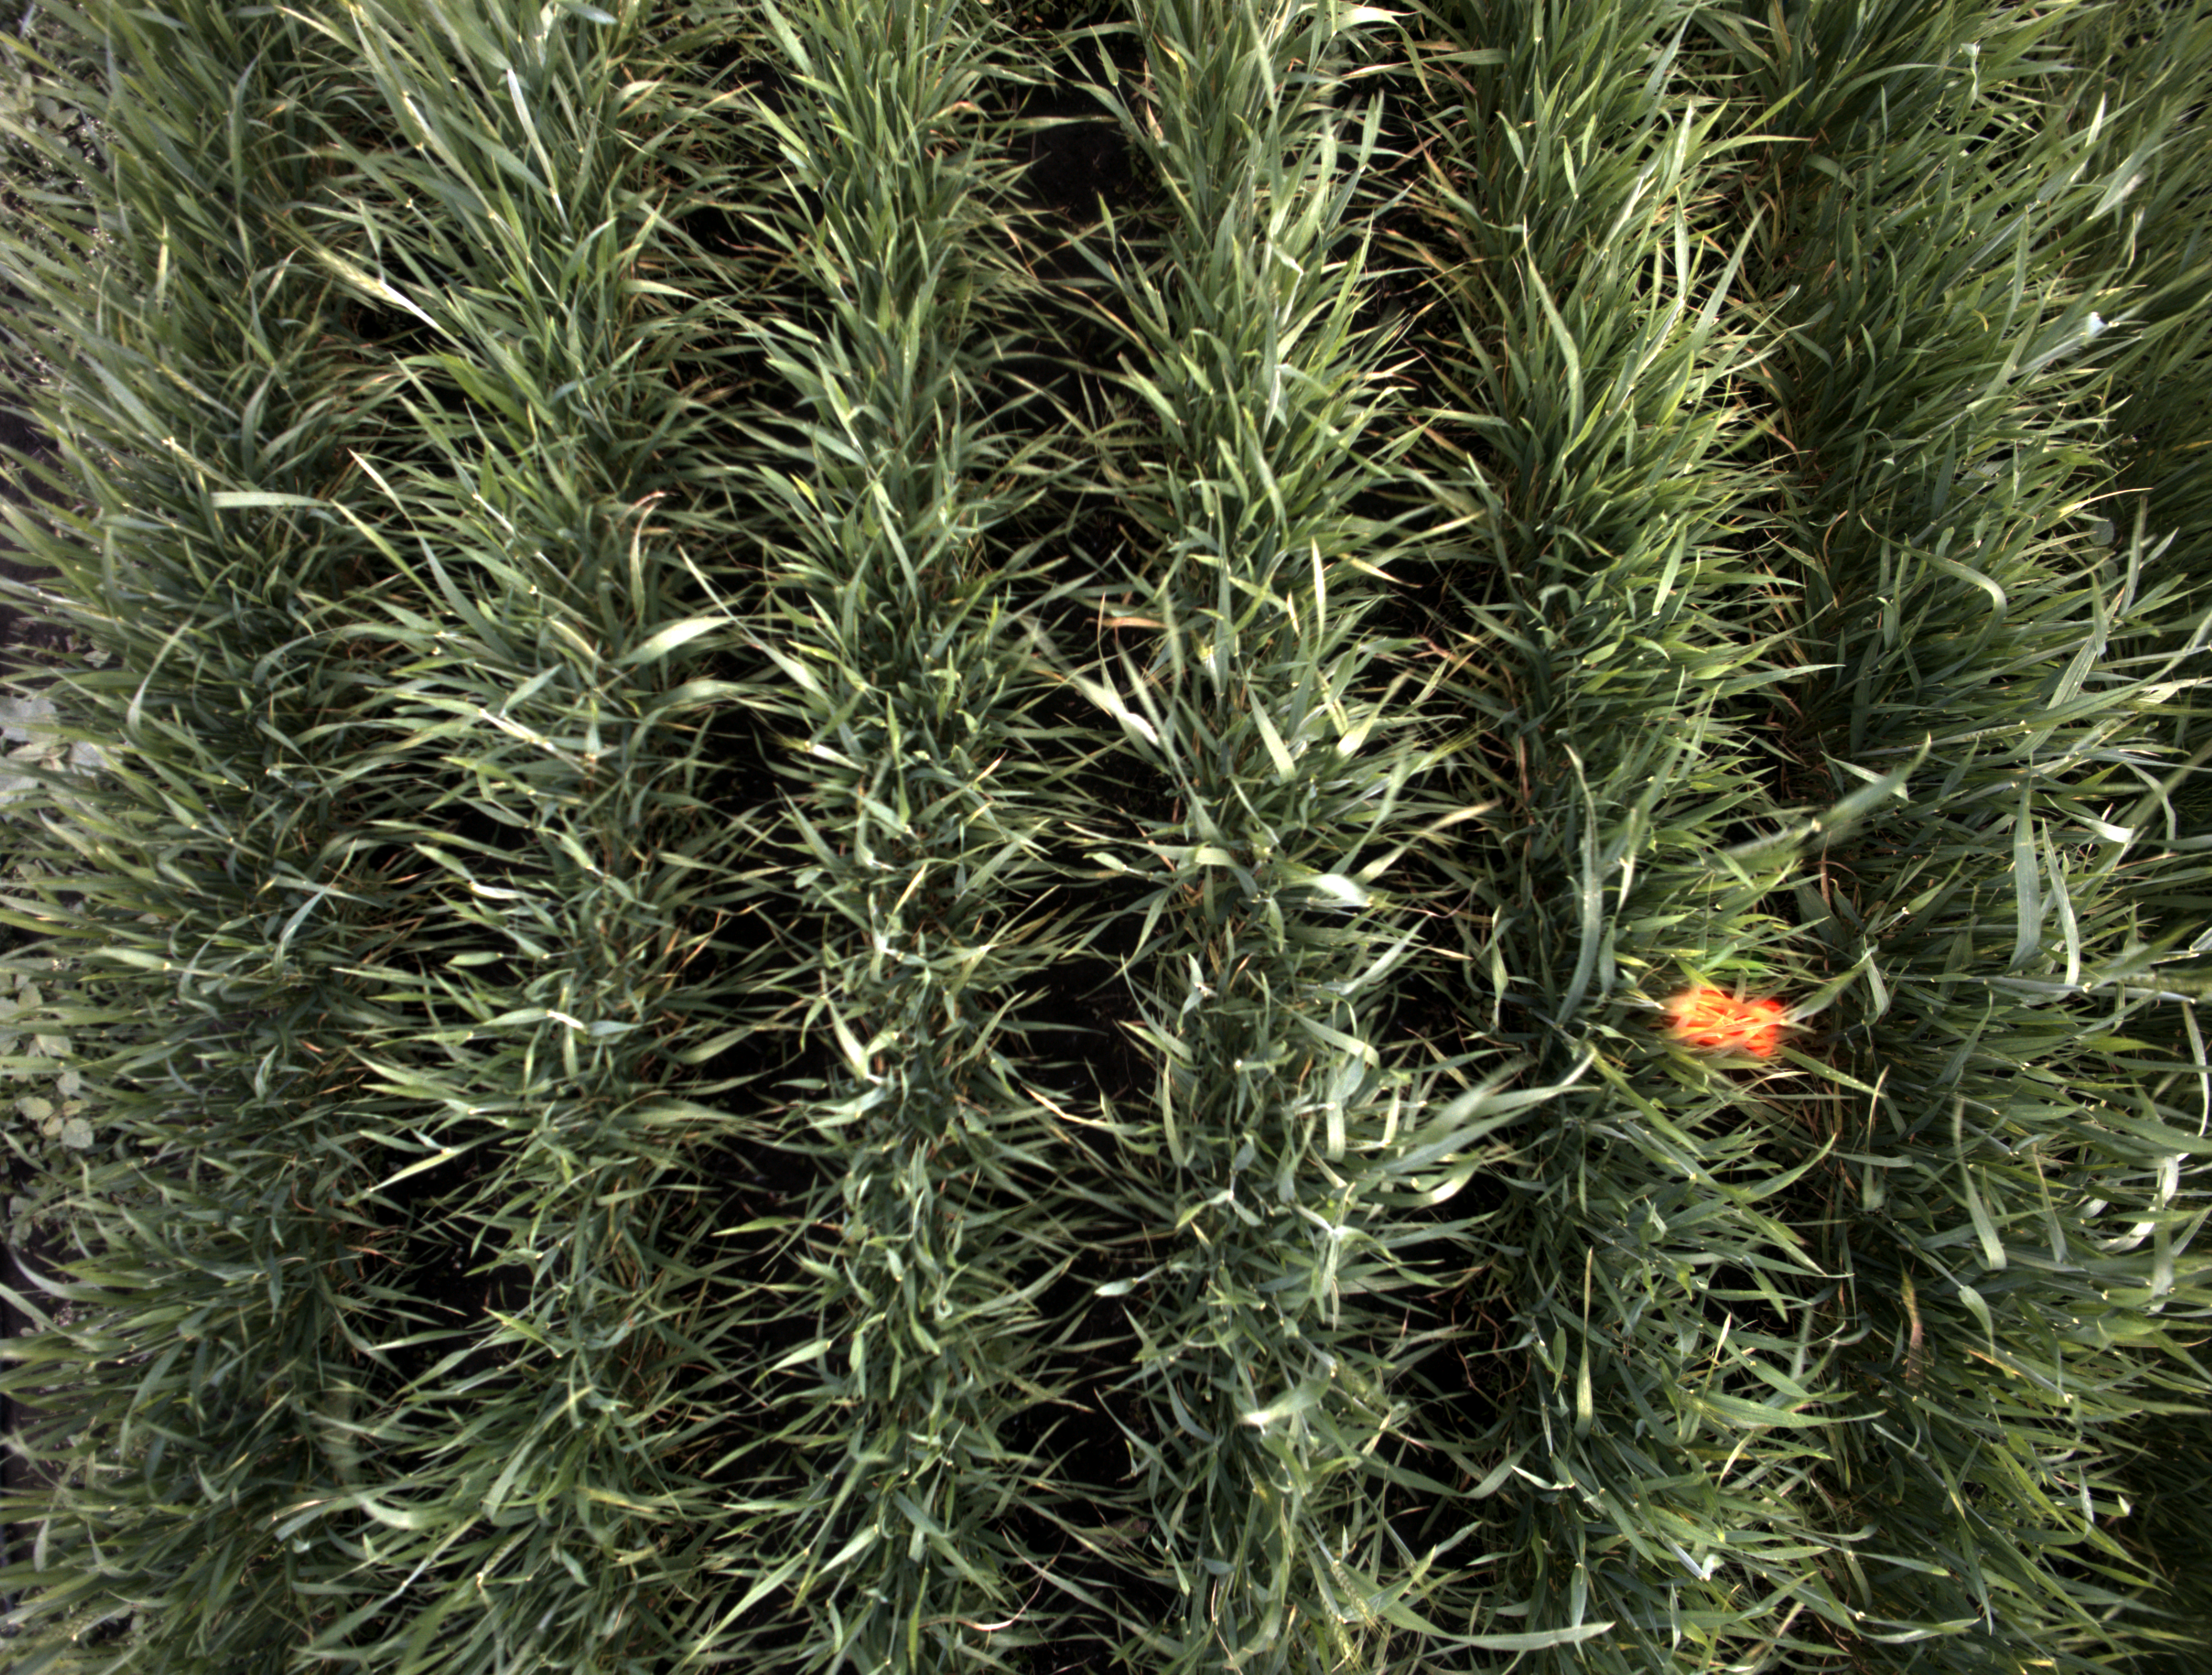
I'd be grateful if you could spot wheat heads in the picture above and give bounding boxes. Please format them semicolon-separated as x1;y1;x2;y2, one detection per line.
1317;1580;1347;1655
1329;1356;1368;1401
1331;1561;1373;1625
